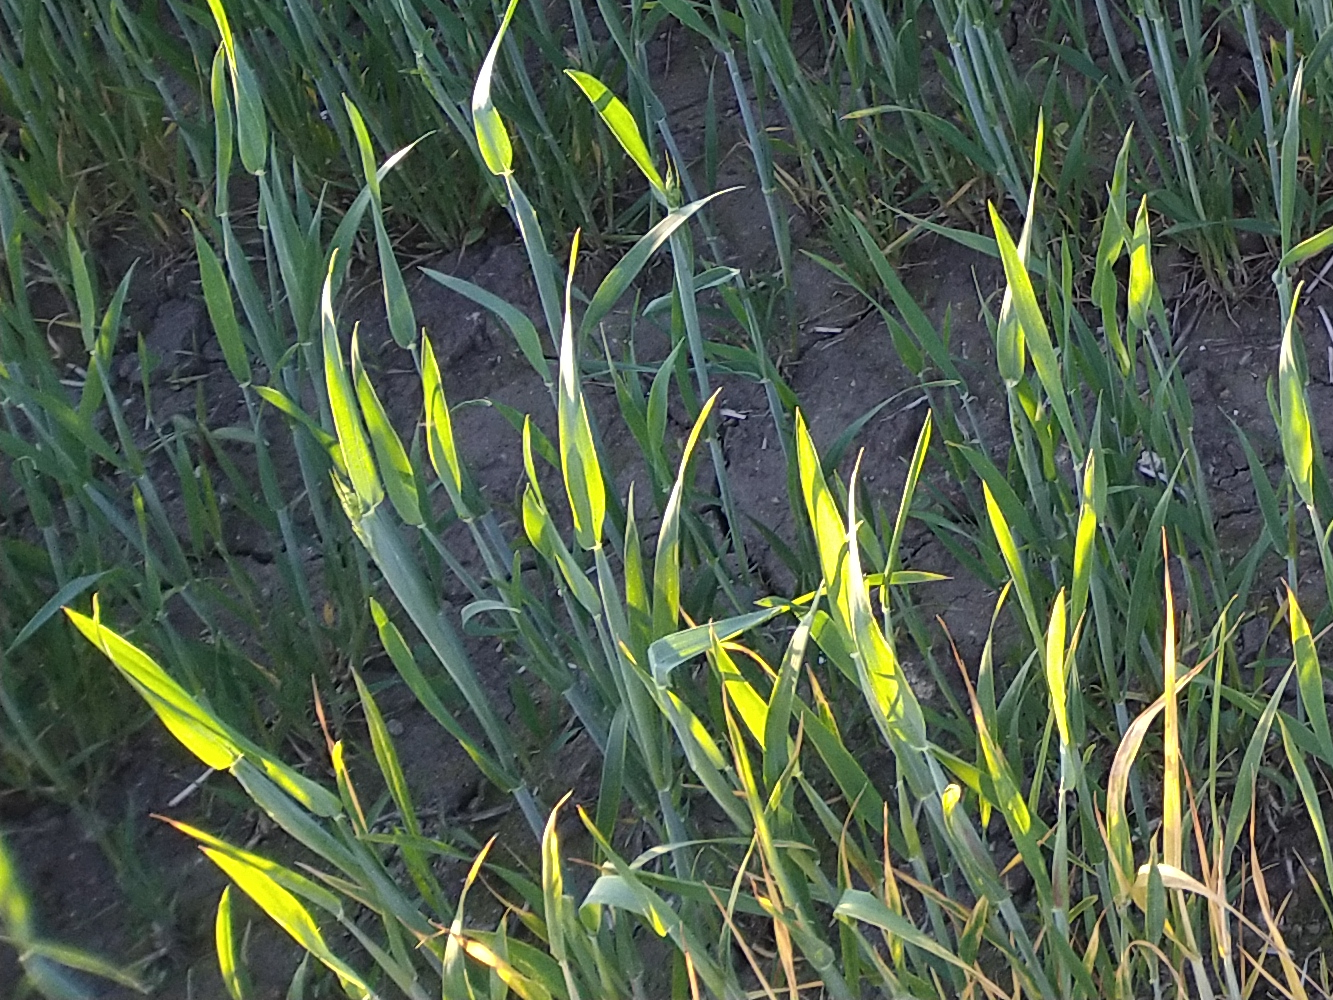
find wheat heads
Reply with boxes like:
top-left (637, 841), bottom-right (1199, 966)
top-left (667, 172), bottom-right (684, 211)
top-left (340, 481), bottom-right (369, 543)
